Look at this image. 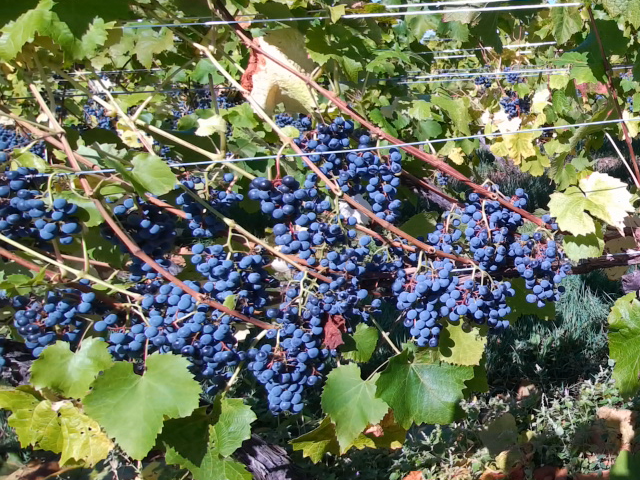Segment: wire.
<instances>
[{
    "mask_svg": "<svg viewBox=\"0 0 640 480\" xmlns=\"http://www.w3.org/2000/svg\"><path fill=\"white\" fill-rule=\"evenodd\" d=\"M630 122H640V117H628V118H612L609 120H598L594 122H583V123H575V124H565V125H555L549 127L542 128H534V129H523L517 131H501L494 133H481L477 135H462L458 137H435L423 140H415V141H405L392 145H375V146H365V147H357L353 149H323L319 151H301V152H292V153H281V158H295V157H303V156H321L326 154H356L360 152L367 151H377V150H395L403 147H413L417 145H426L437 142H460L464 140H479L484 138H496L503 136H519L525 134H536V133H544V132H552L557 130H567V129H578L585 127H596L600 125H611L615 123H630Z\"/></svg>",
    "mask_w": 640,
    "mask_h": 480,
    "instance_id": "1",
    "label": "wire"
},
{
    "mask_svg": "<svg viewBox=\"0 0 640 480\" xmlns=\"http://www.w3.org/2000/svg\"><path fill=\"white\" fill-rule=\"evenodd\" d=\"M117 172L116 168H112V169H92V170H83V171H79V172H72V173H67V172H56L55 176L56 177H65V178H75V177H81V176H85V175H95V174H100V175H105V174H115Z\"/></svg>",
    "mask_w": 640,
    "mask_h": 480,
    "instance_id": "5",
    "label": "wire"
},
{
    "mask_svg": "<svg viewBox=\"0 0 640 480\" xmlns=\"http://www.w3.org/2000/svg\"><path fill=\"white\" fill-rule=\"evenodd\" d=\"M632 254H640V249H630V250H624V251H613L608 253H602L601 257L610 258L615 256H626V255H632Z\"/></svg>",
    "mask_w": 640,
    "mask_h": 480,
    "instance_id": "6",
    "label": "wire"
},
{
    "mask_svg": "<svg viewBox=\"0 0 640 480\" xmlns=\"http://www.w3.org/2000/svg\"><path fill=\"white\" fill-rule=\"evenodd\" d=\"M278 158L277 154L272 155H260L254 157H246V158H226V159H215V160H196V161H182L171 163V168L185 167V166H198V165H218V164H229V163H248V162H257L263 160H275Z\"/></svg>",
    "mask_w": 640,
    "mask_h": 480,
    "instance_id": "4",
    "label": "wire"
},
{
    "mask_svg": "<svg viewBox=\"0 0 640 480\" xmlns=\"http://www.w3.org/2000/svg\"><path fill=\"white\" fill-rule=\"evenodd\" d=\"M329 15H310V16H290V17H271L263 19H246V20H229V21H189L175 24H128V25H110L109 31L112 30H130V29H177L191 26H232V25H248V24H265L273 22H293V21H312V20H329Z\"/></svg>",
    "mask_w": 640,
    "mask_h": 480,
    "instance_id": "3",
    "label": "wire"
},
{
    "mask_svg": "<svg viewBox=\"0 0 640 480\" xmlns=\"http://www.w3.org/2000/svg\"><path fill=\"white\" fill-rule=\"evenodd\" d=\"M582 2H562V3H547V4H518V5H504L483 9H438V10H402L397 12L386 13H362V14H347L340 15V20L349 19H364V18H388L399 17L405 15H440V14H485L507 10H520V9H549V8H564V7H582Z\"/></svg>",
    "mask_w": 640,
    "mask_h": 480,
    "instance_id": "2",
    "label": "wire"
}]
</instances>
